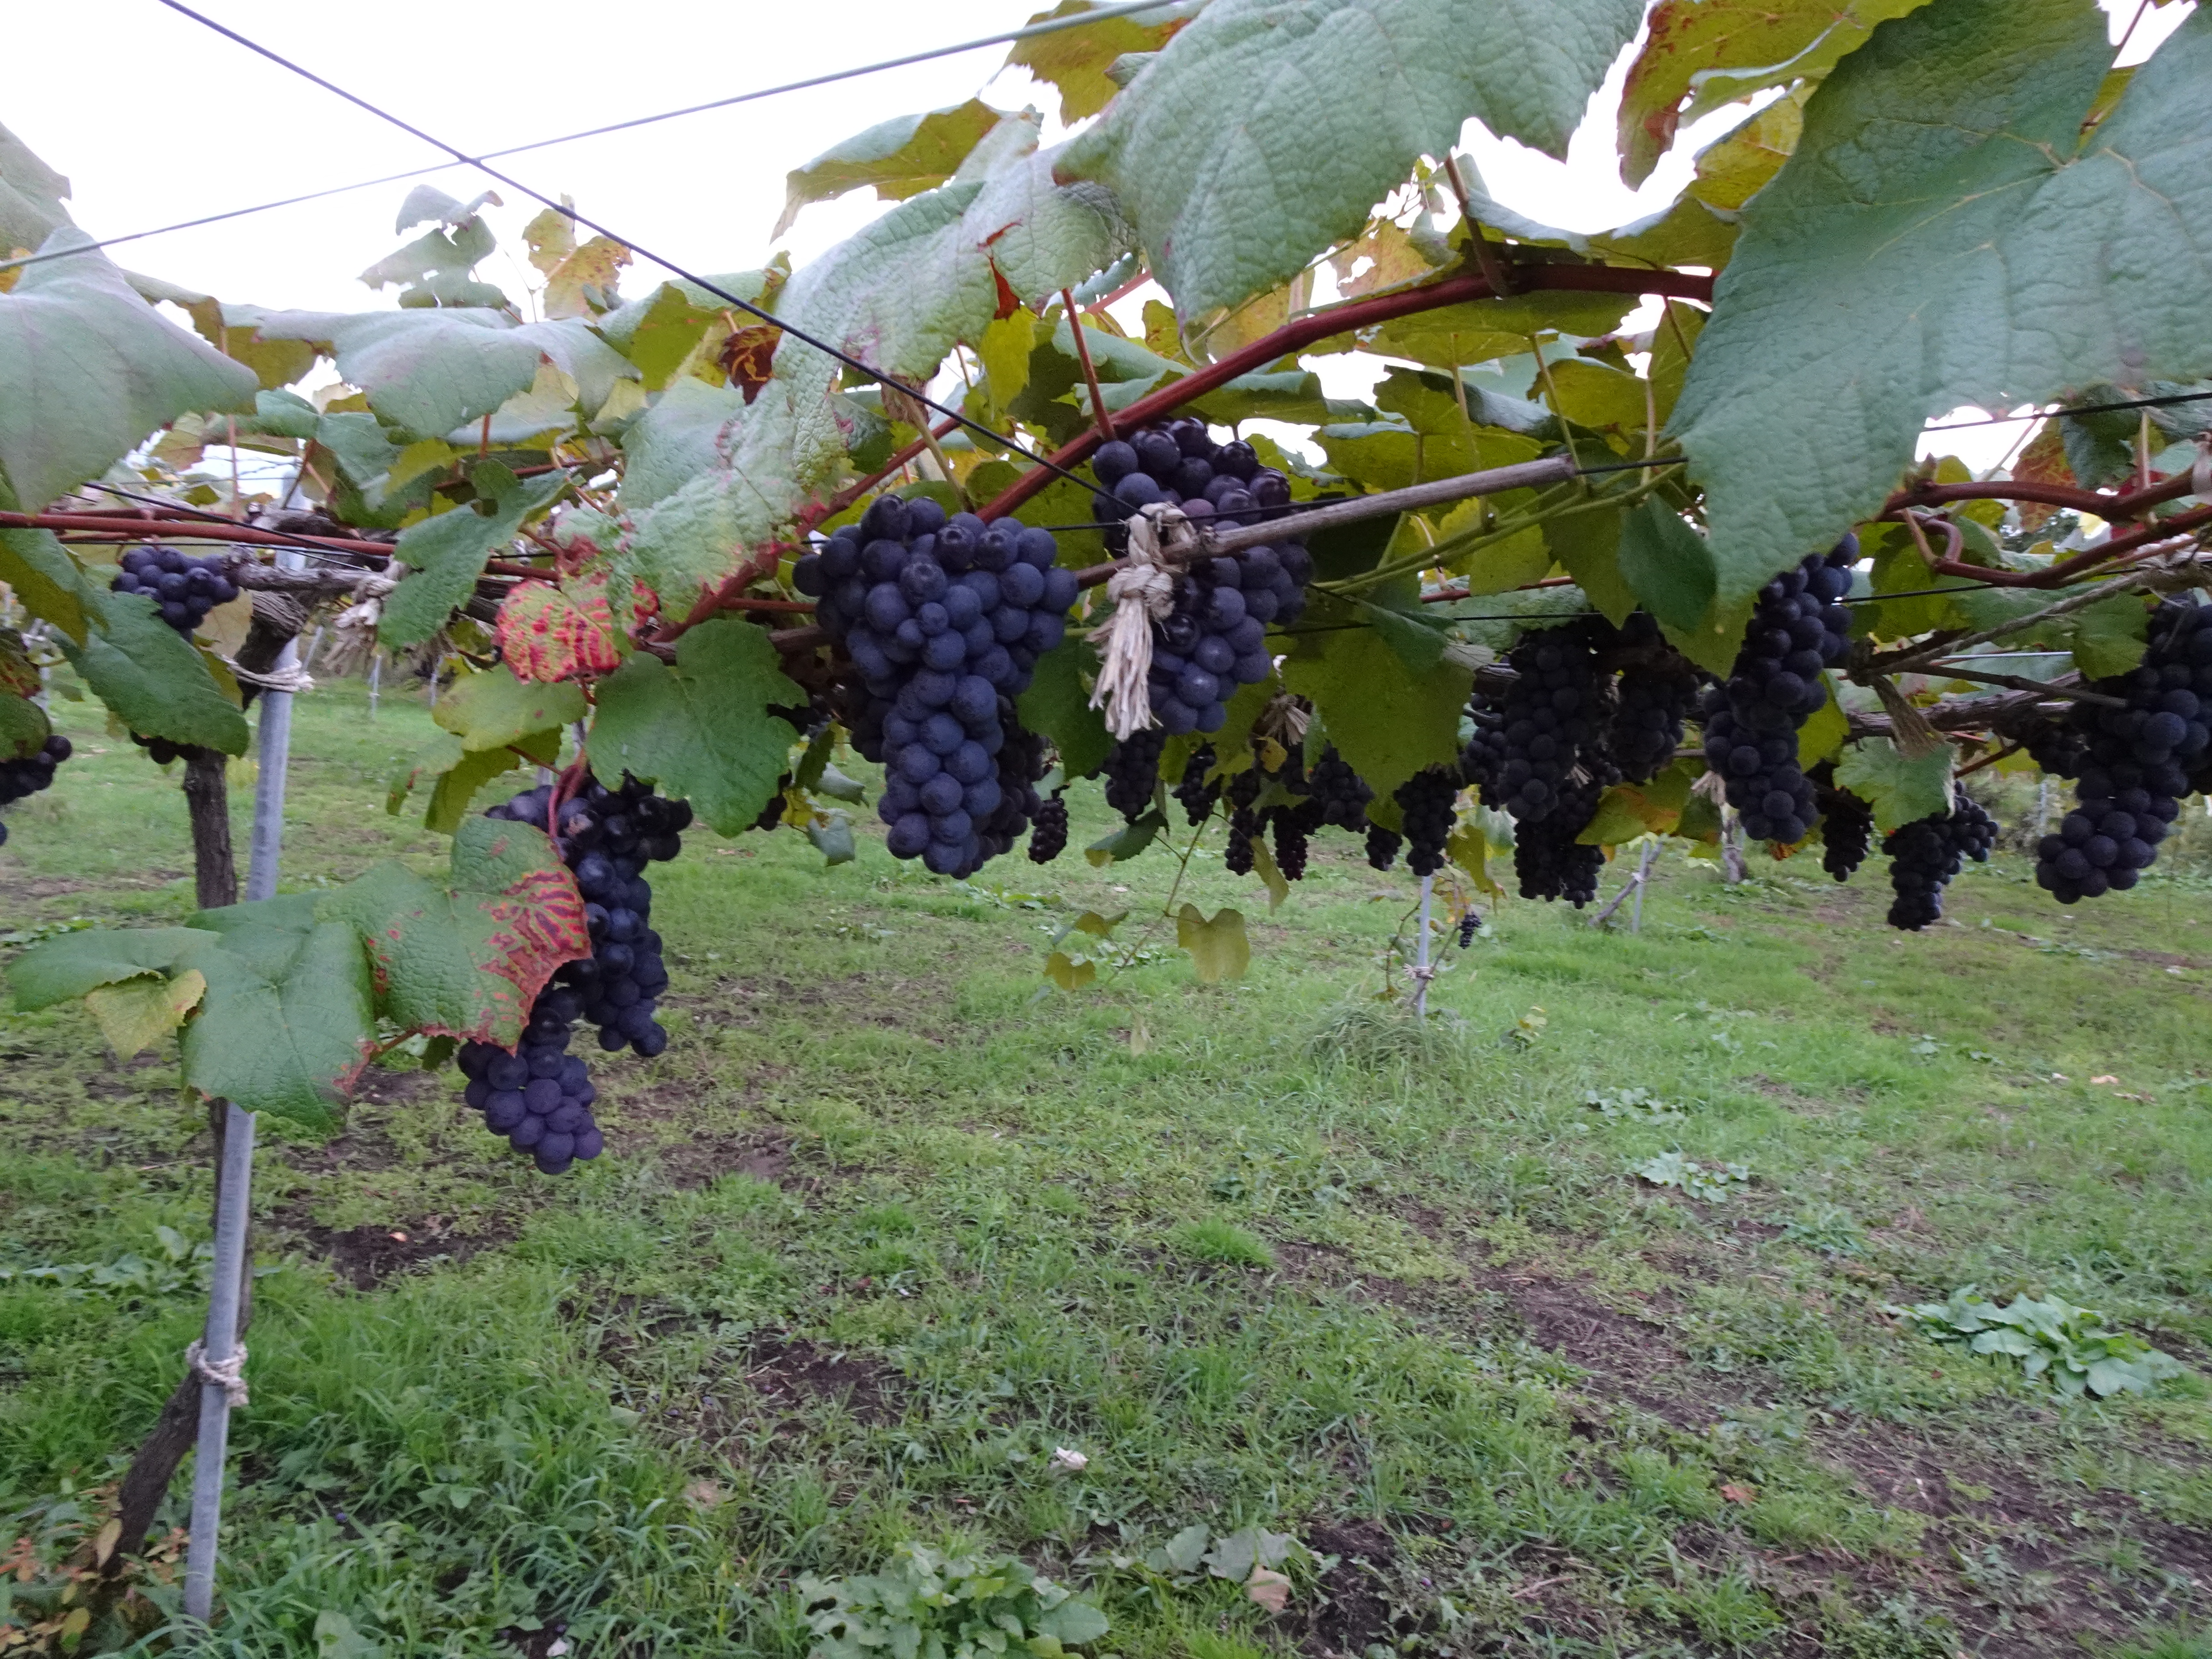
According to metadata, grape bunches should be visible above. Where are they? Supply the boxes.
[1817,787,1874,887]
[1807,530,1860,658]
[2035,738,2192,904]
[1732,538,1826,715]
[1555,781,1607,912]
[1935,778,2001,867]
[484,766,692,1058]
[1490,624,1592,821]
[1169,742,1222,831]
[762,654,831,737]
[743,770,793,830]
[0,629,72,804]
[1608,664,1697,785]
[1364,821,1403,874]
[1027,792,1070,866]
[1272,804,1310,883]
[109,544,240,765]
[1701,687,1821,847]
[1310,743,1374,837]
[790,494,1079,879]
[1224,808,1267,877]
[0,823,6,847]
[982,709,1044,852]
[1510,816,1564,906]
[1100,726,1167,826]
[1093,419,1312,732]
[456,976,604,1175]
[830,638,887,761]
[2067,590,2212,793]
[1455,910,1484,952]
[1881,815,1961,934]
[1393,764,1461,880]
